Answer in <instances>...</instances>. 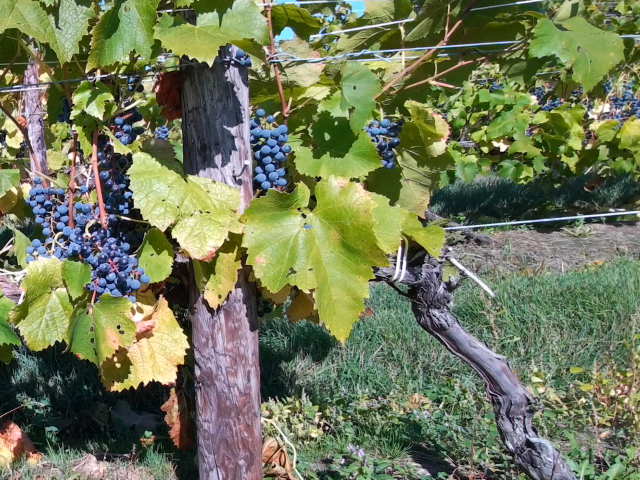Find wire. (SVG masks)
<instances>
[{"instance_id": "d2f4af69", "label": "wire", "mask_w": 640, "mask_h": 480, "mask_svg": "<svg viewBox=\"0 0 640 480\" xmlns=\"http://www.w3.org/2000/svg\"><path fill=\"white\" fill-rule=\"evenodd\" d=\"M522 41H486V42H465V43H453V44H425L415 47L404 48H364L360 51L350 54H321V55H308V56H292L287 58H270V63H289L294 61H310V60H323V59H352L362 56L366 53H406L417 52L420 50L428 49H455V48H467V47H488V46H522Z\"/></svg>"}, {"instance_id": "a73af890", "label": "wire", "mask_w": 640, "mask_h": 480, "mask_svg": "<svg viewBox=\"0 0 640 480\" xmlns=\"http://www.w3.org/2000/svg\"><path fill=\"white\" fill-rule=\"evenodd\" d=\"M639 215H640L639 211H624V212H615V213H588L585 215H562L559 217H552L548 219L500 221V222L476 223L471 225L448 224L444 227V230L445 231H449L451 229L474 230L479 228H490V227L550 224L554 222H561L564 220H588L590 218H617V217L639 216Z\"/></svg>"}, {"instance_id": "4f2155b8", "label": "wire", "mask_w": 640, "mask_h": 480, "mask_svg": "<svg viewBox=\"0 0 640 480\" xmlns=\"http://www.w3.org/2000/svg\"><path fill=\"white\" fill-rule=\"evenodd\" d=\"M113 76L112 72L92 75V76H81V77H70V78H62L59 80H50L46 82H33V83H22L10 86H0V91H12L24 88H35V87H48L52 85H61L64 83H72V82H83V81H94V80H102L108 79Z\"/></svg>"}, {"instance_id": "f0478fcc", "label": "wire", "mask_w": 640, "mask_h": 480, "mask_svg": "<svg viewBox=\"0 0 640 480\" xmlns=\"http://www.w3.org/2000/svg\"><path fill=\"white\" fill-rule=\"evenodd\" d=\"M415 20H416V17L412 16V17H409V18H406V19L391 20V21L384 22V23H381V24H375V25H369V26L343 27V28H339L337 30L325 31L324 33H321V34H312L311 38L312 39H323V38H326L328 36L339 35V34H342V33H345V32L371 31V30L383 29V28L390 27V26H393V25L412 23Z\"/></svg>"}, {"instance_id": "a009ed1b", "label": "wire", "mask_w": 640, "mask_h": 480, "mask_svg": "<svg viewBox=\"0 0 640 480\" xmlns=\"http://www.w3.org/2000/svg\"><path fill=\"white\" fill-rule=\"evenodd\" d=\"M546 2L547 0H519V1L509 2V3H500L497 5L473 7L472 11L473 12L492 11V10H499L502 8H511L516 6H521V5H540Z\"/></svg>"}, {"instance_id": "34cfc8c6", "label": "wire", "mask_w": 640, "mask_h": 480, "mask_svg": "<svg viewBox=\"0 0 640 480\" xmlns=\"http://www.w3.org/2000/svg\"><path fill=\"white\" fill-rule=\"evenodd\" d=\"M198 65H199L198 61H188V62H185V63H179V64L172 65V66H165L164 70L165 71H174V70H178V69H181V68H188V67H191V66H198Z\"/></svg>"}]
</instances>
